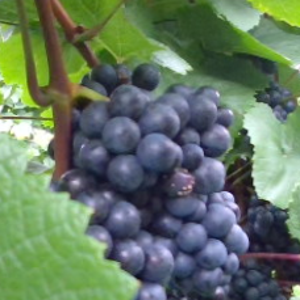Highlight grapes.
Here are the masks:
<instances>
[{
  "label": "grapes",
  "instance_id": "grapes-1",
  "mask_svg": "<svg viewBox=\"0 0 300 300\" xmlns=\"http://www.w3.org/2000/svg\"><path fill=\"white\" fill-rule=\"evenodd\" d=\"M149 62L95 65L81 80L111 101L71 107L70 169L60 191L96 208L86 233L141 285L133 300L179 293L222 300L249 248L241 210L215 157L230 146V106L213 87L175 83L154 102Z\"/></svg>",
  "mask_w": 300,
  "mask_h": 300
}]
</instances>
